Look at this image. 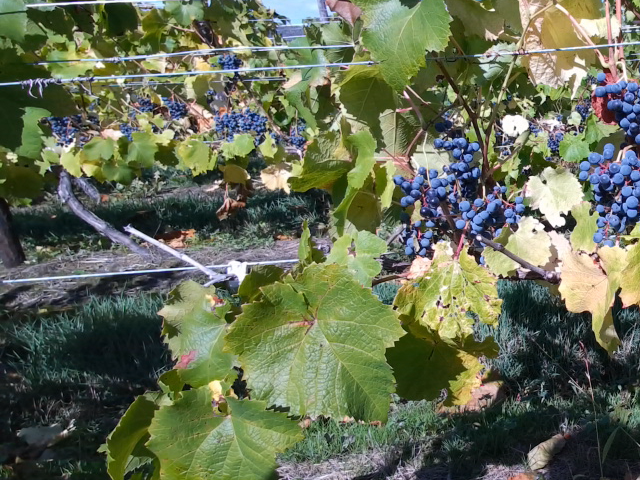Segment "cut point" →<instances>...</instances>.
<instances>
[{"label": "cut point", "mask_w": 640, "mask_h": 480, "mask_svg": "<svg viewBox=\"0 0 640 480\" xmlns=\"http://www.w3.org/2000/svg\"><path fill=\"white\" fill-rule=\"evenodd\" d=\"M428 134H429V129L425 132V138H424V141H423V144H422V155H423V158L425 159V163H428V156L425 153V146H426L427 141H428Z\"/></svg>", "instance_id": "cut-point-1"}, {"label": "cut point", "mask_w": 640, "mask_h": 480, "mask_svg": "<svg viewBox=\"0 0 640 480\" xmlns=\"http://www.w3.org/2000/svg\"><path fill=\"white\" fill-rule=\"evenodd\" d=\"M625 152H626V149H623V150L619 151V152H618V154H617V157H616V161H619L620 156H621V155H624V154H625Z\"/></svg>", "instance_id": "cut-point-2"}]
</instances>
